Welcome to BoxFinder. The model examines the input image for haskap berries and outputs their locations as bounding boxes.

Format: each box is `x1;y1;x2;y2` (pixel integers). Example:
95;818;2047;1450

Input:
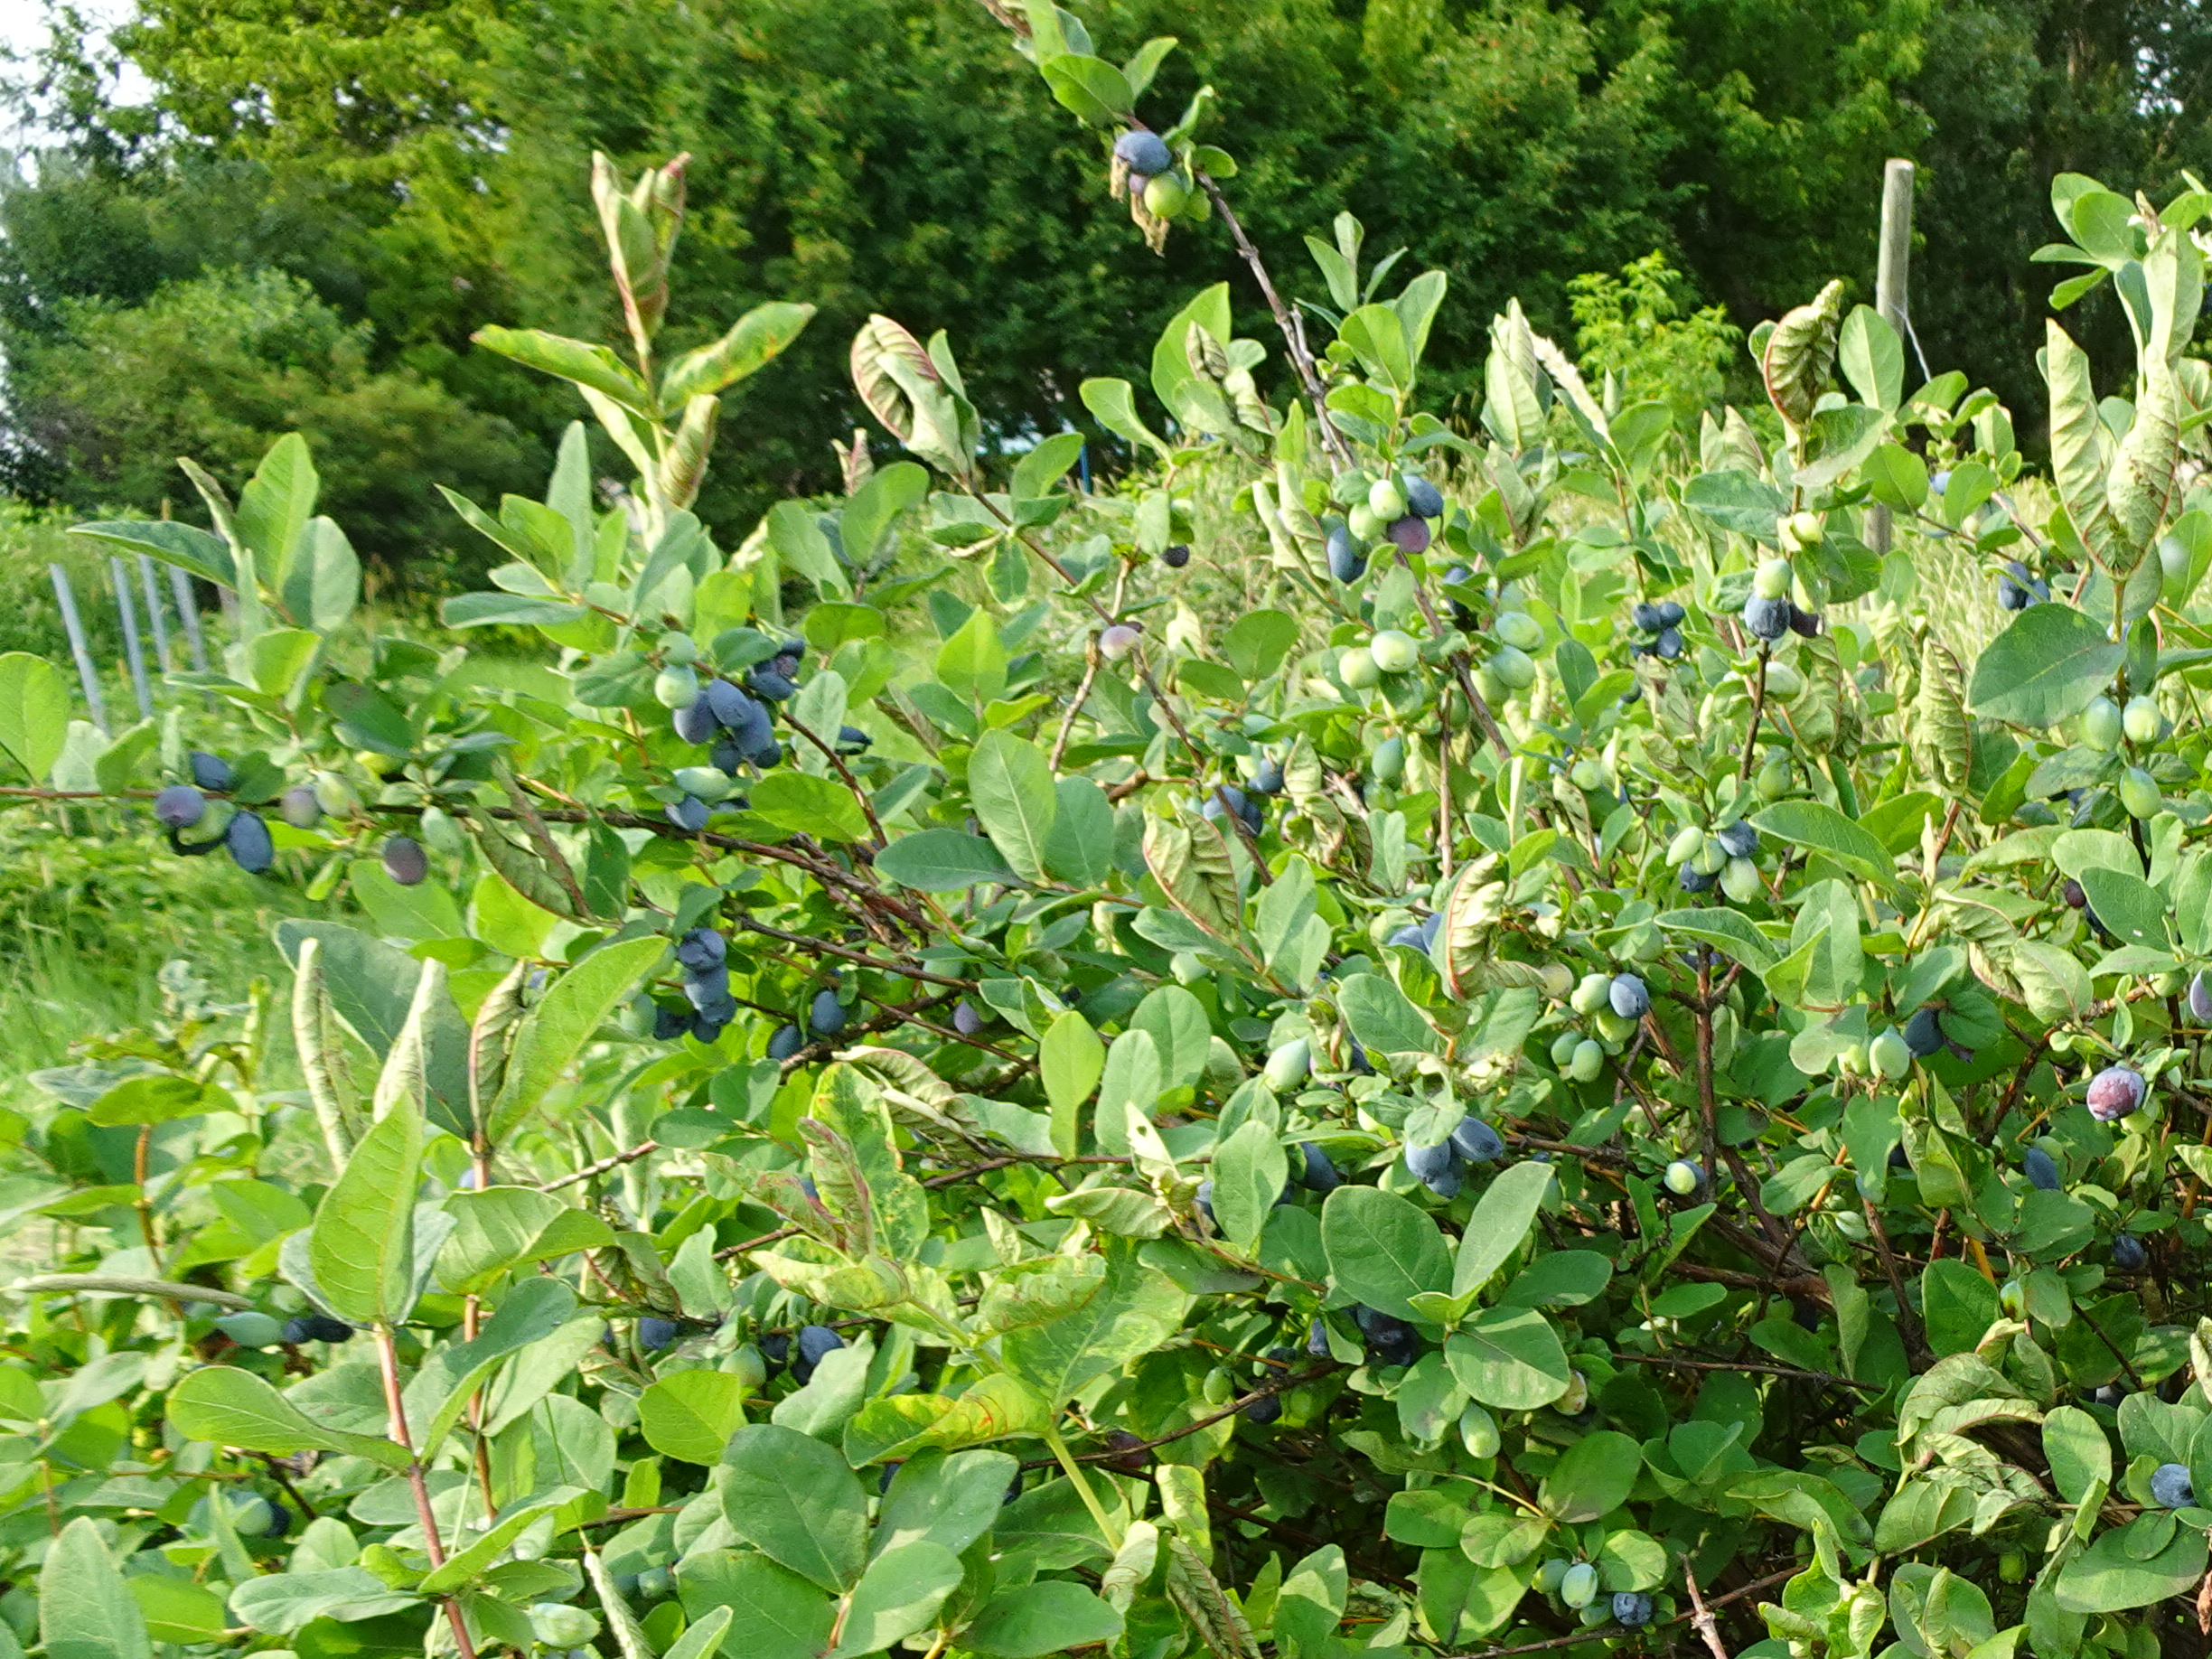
1572;762;1604;790
2068;788;2082;803
830;968;841;980
778;639;804;661
709;680;752;727
1450;1116;1502;1162
810;991;849;1037
1318;971;1333;985
1620;683;1642;703
1572;972;1610;1014
1853;1176;1887;1203
833;725;871;755
1679;853;1718;890
1614;1592;1654;1625
1472;661;1512;706
1530;1558;1572;1593
881;1462;899;1493
2150;1464;2196;1510
1249;778;1258;790
1616;825;1643;855
1632;602;1662;635
1944;1033;1974;1063
1837;1031;1873;1076
1205;785;1246;821
2000;1281;2028;1324
777;654;800;676
1791;512;1823;544
1375;1333;1417;1368
1169;952;1208;986
752;743;782;768
1160;543;1188;567
1563;1563;1599;1610
886;1638;925;1659
1105;1431;1151;1469
1368;478;1404;519
1537;964;1573;999
2204;283;2212;308
1612;973;1649;1018
657;631;698;667
1171;498;1195;519
261;1502;292;1538
191;1300;218;1318
2100;933;2126;950
1255;1297;1293;1322
1257;758;1284;796
2065;878;2087;909
283;784;322;831
710;796;753;816
1757;758;1791;801
1273;1180;1295;1204
955;999;989;1035
735;698;773;758
1783;599;1817;637
2190;964;2212;1022
1358;1107;1379;1132
751;671;793;698
1657;628;1683;657
1203;1366;1235;1405
1215;1460;1253;1499
666;797;707;831
1388;515;1430;553
1933;471;1953;496
683;965;729;1008
1532;1151;1550;1161
1663;1163;1695;1195
620;993;654;1037
637;1313;676;1349
711;735;742;773
693;1013;720;1043
1667;825;1702;865
802;1179;823;1202
653;998;694;1041
1458;1405;1500;1460
1443;566;1482;630
1744;586;1790;640
758;1334;794;1382
211;1313;281;1348
671;767;732;797
1002;1471;1023;1506
270;1282;308;1311
1792;568;1832;614
178;799;236;847
1657;601;1685;626
535;1640;608;1659
852;839;881;863
791;1349;813;1388
1370;630;1416;674
1307;1319;1327;1356
229;810;273;877
1788;1294;1817;1335
2034;1135;2063;1160
1835;1210;1870;1241
271;1318;310;1346
1267;1505;1319;1549
1235;738;1262;778
1632;639;1657;662
1618;780;1626;805
2120;766;2163;819
719;1340;766;1391
1363;779;1395;814
177;1440;211;1485
1387;926;1431;957
1567;746;1572;757
1795;1530;1818;1566
1595;1005;1639;1041
2023;1148;2061;1191
1190;1180;1224;1242
637;1562;670;1600
1579;1594;1615;1627
1243;716;1294;765
673;693;717;745
1571;1040;1604;1084
1296;1144;1338;1193
2086;904;2108;934
2027;577;2050;608
1059;986;1084;1002
525;968;551;990
1755;558;1791;598
316;772;365;820
1824;1195;1846;1210
1426;1147;1461;1198
2000;560;2035;611
1691;841;1727;875
232;1490;272;1534
530;1602;598;1648
1307;1044;1370;1088
2114;1233;2143;1270
2124;694;2161;745
656;665;697;710
1998;1546;2027;1582
767;1025;803;1062
1870;1024;1911;1081
743;657;776;689
381;833;430;887
1404;476;1444;516
2079;695;2123;751
1118;131;1171;175
1129;173;1153;193
1264;1037;1310;1093
1099;626;1140;658
1345;1367;1385;1395
1408;1137;1448;1179
2095;1382;2125;1409
1679;1157;1705;1182
1493;609;1545;652
700;994;736;1025
1887;1144;1909;1170
1348;505;1387;543
1550;1367;1586;1418
1357;1299;1407;1346
1904;1009;1947;1058
1144;173;1187;217
2148;966;2186;998
1491;647;1537;691
1677;944;1718;972
612;1570;635;1600
680;929;726;972
923;959;964;999
2121;1097;2161;1134
798;1325;845;1364
1423;914;1445;954
290;1312;353;1343
1552;1031;1581;1065
1442;681;1468;726
154;786;203;829
1449;618;1472;632
989;1014;1018;1035
1603;1630;1634;1647
1717;818;1758;857
1719;855;1759;905
2204;1212;2212;1240
1326;525;1372;585
187;755;237;792
1372;735;1405;779
2087;1068;2143;1121
1268;1348;1298;1377
1339;646;1381;689
1249;1392;1283;1423
1235;800;1262;839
